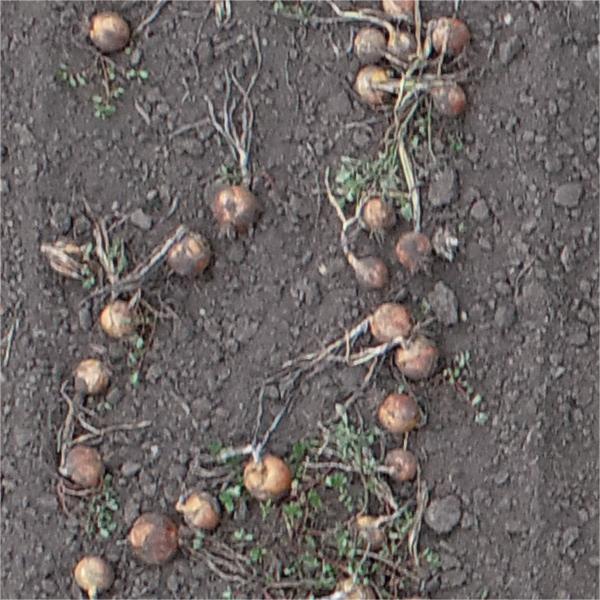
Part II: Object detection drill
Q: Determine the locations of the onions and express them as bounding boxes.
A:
[353,510,384,541]
[372,302,409,341]
[378,391,422,431]
[427,18,467,55]
[244,454,291,497]
[88,10,128,51]
[213,183,261,227]
[331,572,372,598]
[96,300,134,336]
[353,25,385,60]
[167,230,210,273]
[125,515,177,565]
[353,62,393,104]
[393,230,429,269]
[72,554,113,590]
[71,357,108,394]
[381,448,416,482]
[426,80,464,117]
[359,196,395,231]
[383,0,417,19]
[350,254,385,287]
[389,27,418,62]
[178,489,218,530]
[60,445,101,488]
[395,337,434,377]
